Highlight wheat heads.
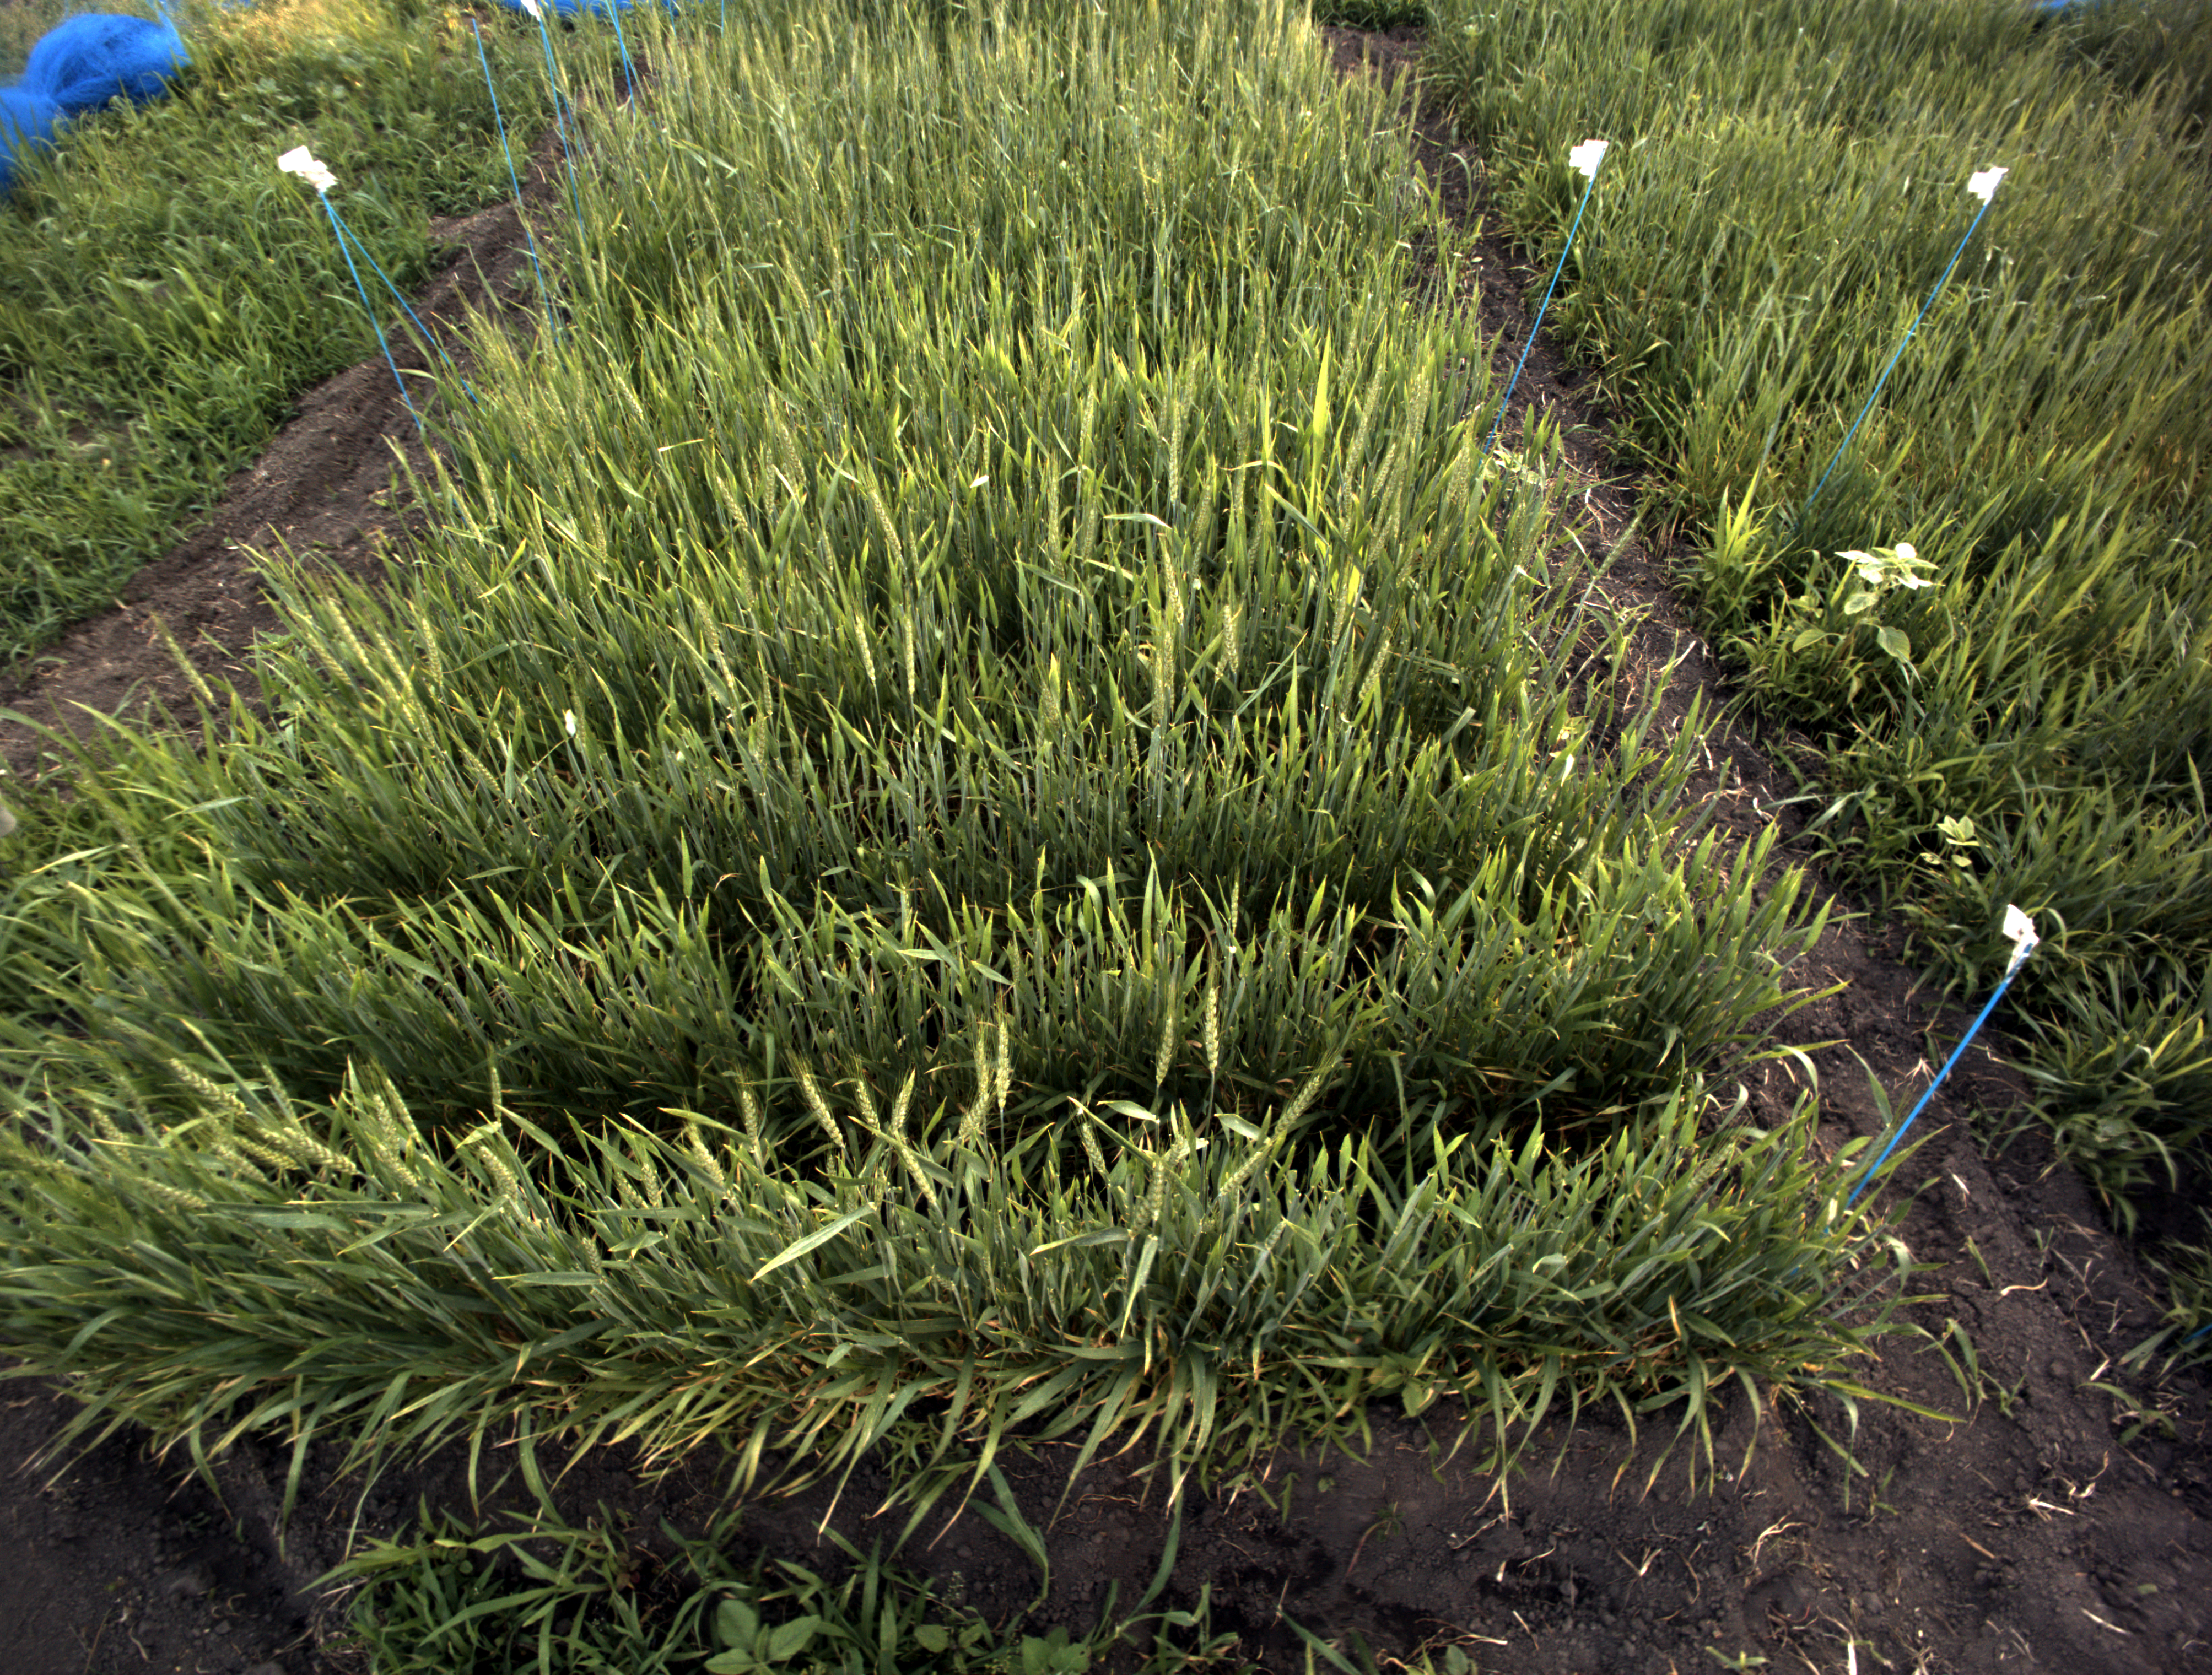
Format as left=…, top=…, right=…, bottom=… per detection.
left=697, top=596, right=721, bottom=652
left=1322, top=46, right=1332, bottom=83
left=852, top=612, right=877, bottom=688
left=783, top=252, right=811, bottom=313
left=1231, top=138, right=1243, bottom=179
left=633, top=1263, right=644, bottom=1281
left=1215, top=647, right=1228, bottom=683
left=779, top=1209, right=794, bottom=1235
left=548, top=380, right=568, bottom=416
left=769, top=43, right=787, bottom=97
left=567, top=465, right=579, bottom=495
left=1869, top=1127, right=1894, bottom=1165
left=935, top=314, right=945, bottom=367
left=721, top=93, right=742, bottom=127
left=1192, top=485, right=1211, bottom=539
left=1190, top=541, right=1203, bottom=583
left=1144, top=180, right=1155, bottom=210
left=1286, top=48, right=1299, bottom=92
left=1391, top=83, right=1403, bottom=112
left=900, top=1147, right=939, bottom=1207
left=666, top=42, right=687, bottom=99
left=614, top=1170, right=649, bottom=1211
left=952, top=50, right=962, bottom=81
left=684, top=174, right=697, bottom=212
left=658, top=97, right=671, bottom=132
left=1770, top=293, right=1785, bottom=324
left=545, top=770, right=558, bottom=791
left=859, top=144, right=871, bottom=179
left=969, top=118, right=987, bottom=152
left=812, top=30, right=822, bottom=52
left=372, top=1093, right=402, bottom=1165
left=1128, top=726, right=1141, bottom=765
left=1614, top=88, right=1624, bottom=110
left=1358, top=639, right=1391, bottom=702
left=255, top=1125, right=303, bottom=1157
left=799, top=942, right=814, bottom=976
left=1674, top=105, right=1688, bottom=131
left=1107, top=52, right=1114, bottom=93
left=1418, top=525, right=1448, bottom=578
left=995, top=1018, right=1011, bottom=1107
left=1513, top=508, right=1525, bottom=557
left=1091, top=26, right=1100, bottom=79
left=696, top=23, right=708, bottom=72
left=1396, top=547, right=1414, bottom=589
left=1341, top=523, right=1351, bottom=539
left=742, top=564, right=757, bottom=606
left=1256, top=287, right=1266, bottom=344
left=969, top=1036, right=992, bottom=1118
left=1475, top=345, right=1494, bottom=382
left=375, top=1141, right=419, bottom=1188
left=598, top=250, right=608, bottom=284
left=1782, top=107, right=1793, bottom=126
left=754, top=711, right=766, bottom=766
left=286, top=587, right=307, bottom=616
left=838, top=758, right=849, bottom=794
left=606, top=65, right=616, bottom=103
left=292, top=1272, right=335, bottom=1300
left=703, top=293, right=715, bottom=347
left=822, top=12, right=835, bottom=54
left=1257, top=32, right=1263, bottom=55
left=758, top=667, right=774, bottom=712
left=1011, top=944, right=1022, bottom=987
left=845, top=1188, right=857, bottom=1215
left=810, top=63, right=817, bottom=96
left=1821, top=116, right=1835, bottom=139
left=1078, top=1120, right=1108, bottom=1174
left=1140, top=40, right=1152, bottom=69
left=922, top=728, right=933, bottom=755
left=580, top=411, right=595, bottom=451
left=1034, top=156, right=1041, bottom=186
left=1131, top=9, right=1138, bottom=48
left=101, top=802, right=149, bottom=865
left=701, top=195, right=720, bottom=227
left=1691, top=230, right=1704, bottom=258
left=1333, top=680, right=1354, bottom=737
left=852, top=107, right=857, bottom=124
left=1233, top=464, right=1245, bottom=514
left=1372, top=506, right=1383, bottom=540
left=589, top=532, right=602, bottom=564
left=804, top=67, right=812, bottom=112
left=1032, top=54, right=1042, bottom=88
left=1072, top=18, right=1079, bottom=53
left=579, top=73, right=591, bottom=108
left=687, top=1121, right=707, bottom=1171
left=649, top=166, right=662, bottom=199
left=902, top=617, right=917, bottom=697
left=691, top=70, right=704, bottom=118
left=1396, top=764, right=1404, bottom=784
left=339, top=953, right=356, bottom=979
left=1167, top=76, right=1176, bottom=105
left=1009, top=46, right=1016, bottom=87
left=1166, top=111, right=1176, bottom=149
left=1040, top=678, right=1061, bottom=735
left=1371, top=441, right=1396, bottom=497
left=528, top=412, right=547, bottom=456
left=1745, top=100, right=1758, bottom=126
left=791, top=752, right=803, bottom=790
left=1153, top=160, right=1160, bottom=185
left=1576, top=852, right=1596, bottom=902
left=1342, top=82, right=1348, bottom=122
left=1168, top=1133, right=1189, bottom=1167
left=1723, top=134, right=1740, bottom=172
left=1393, top=481, right=1402, bottom=540
left=1166, top=150, right=1177, bottom=183
left=705, top=764, right=718, bottom=798
left=840, top=72, right=851, bottom=114
left=1553, top=495, right=1568, bottom=535
left=542, top=79, right=558, bottom=110
left=997, top=21, right=1005, bottom=44
left=1781, top=64, right=1796, bottom=96
left=910, top=81, right=918, bottom=113
left=477, top=1142, right=520, bottom=1215
left=1134, top=73, right=1142, bottom=115
left=1520, top=519, right=1542, bottom=566
left=778, top=761, right=789, bottom=786
left=1219, top=1152, right=1265, bottom=1193
left=468, top=313, right=506, bottom=377
left=1967, top=130, right=1976, bottom=149
left=740, top=44, right=763, bottom=125
left=1205, top=982, right=1220, bottom=1070
left=1311, top=369, right=1318, bottom=394
left=133, top=1175, right=209, bottom=1210
left=654, top=23, right=671, bottom=85
left=649, top=28, right=660, bottom=73
left=823, top=1152, right=838, bottom=1186
left=1363, top=362, right=1382, bottom=413
left=761, top=131, right=768, bottom=164
left=1046, top=472, right=1062, bottom=536
left=1128, top=1184, right=1156, bottom=1238
left=88, top=1104, right=133, bottom=1164
left=1161, top=549, right=1185, bottom=625
left=1278, top=40, right=1289, bottom=80
left=1340, top=131, right=1346, bottom=160
left=794, top=196, right=803, bottom=223
left=260, top=1061, right=299, bottom=1123
left=966, top=207, right=977, bottom=241
left=637, top=170, right=654, bottom=201
left=1291, top=360, right=1299, bottom=401
left=1359, top=57, right=1370, bottom=107
left=2039, top=118, right=2048, bottom=147
left=981, top=428, right=992, bottom=467
left=931, top=52, right=937, bottom=89
left=1344, top=416, right=1368, bottom=483
left=1593, top=516, right=1640, bottom=583
left=893, top=56, right=899, bottom=93
left=1035, top=301, right=1047, bottom=352
left=802, top=1073, right=847, bottom=1148
left=591, top=508, right=607, bottom=560
left=170, top=1055, right=248, bottom=1114
left=1403, top=635, right=1412, bottom=658
left=906, top=54, right=913, bottom=83
left=700, top=72, right=715, bottom=122
left=489, top=1065, right=504, bottom=1121
left=753, top=179, right=764, bottom=215
left=594, top=1289, right=610, bottom=1305
left=1330, top=583, right=1348, bottom=646
left=667, top=510, right=679, bottom=531
left=790, top=29, right=799, bottom=64
left=2093, top=200, right=2116, bottom=227
left=718, top=108, right=728, bottom=141
left=1093, top=768, right=1099, bottom=799
left=707, top=638, right=734, bottom=690
left=1407, top=374, right=1424, bottom=439
left=942, top=159, right=950, bottom=200
left=782, top=455, right=798, bottom=496
left=1271, top=0, right=1284, bottom=61
left=896, top=1081, right=913, bottom=1130
left=85, top=1007, right=134, bottom=1036
left=1189, top=20, right=1210, bottom=93
left=1161, top=628, right=1175, bottom=710
left=840, top=198, right=852, bottom=230
left=966, top=0, right=983, bottom=40
left=858, top=746, right=869, bottom=781
left=554, top=75, right=572, bottom=106
left=114, top=1072, right=153, bottom=1129
left=414, top=701, right=435, bottom=747
left=918, top=51, right=929, bottom=92
left=1316, top=38, right=1323, bottom=56
left=639, top=1160, right=660, bottom=1207
left=1080, top=197, right=1087, bottom=225
left=901, top=884, right=913, bottom=925
left=605, top=125, right=622, bottom=162
left=820, top=532, right=834, bottom=572
left=164, top=636, right=216, bottom=702
left=864, top=23, right=868, bottom=76
left=1368, top=516, right=1394, bottom=565
left=1311, top=117, right=1319, bottom=147
left=932, top=405, right=939, bottom=432
left=1757, top=142, right=1782, bottom=185
left=1081, top=507, right=1095, bottom=564
left=595, top=120, right=615, bottom=157
left=1159, top=194, right=1166, bottom=217
left=421, top=615, right=445, bottom=683
left=620, top=138, right=629, bottom=160
left=691, top=654, right=720, bottom=701
left=865, top=486, right=903, bottom=557
left=376, top=633, right=414, bottom=696
left=1542, top=601, right=1558, bottom=633
left=1247, top=778, right=1260, bottom=814
left=975, top=51, right=989, bottom=89
left=714, top=474, right=750, bottom=529
left=1273, top=1073, right=1320, bottom=1137
left=887, top=181, right=898, bottom=211
left=385, top=1075, right=421, bottom=1143
left=1645, top=114, right=1658, bottom=140
left=402, top=460, right=425, bottom=507
left=1149, top=1156, right=1165, bottom=1223
left=6, top=1148, right=62, bottom=1174
left=1151, top=647, right=1164, bottom=728
left=1248, top=519, right=1264, bottom=571
left=1227, top=743, right=1239, bottom=782
left=914, top=242, right=924, bottom=267
left=1713, top=231, right=1724, bottom=259
left=1458, top=446, right=1471, bottom=510
left=1697, top=154, right=1705, bottom=187
left=738, top=454, right=755, bottom=498
left=1955, top=152, right=1971, bottom=180
left=991, top=501, right=999, bottom=524
left=1312, top=62, right=1320, bottom=100
left=666, top=92, right=679, bottom=132
left=1221, top=602, right=1240, bottom=673
left=740, top=1085, right=759, bottom=1147
left=1229, top=878, right=1240, bottom=936
left=1425, top=925, right=1443, bottom=972
left=674, top=41, right=685, bottom=81
left=305, top=631, right=354, bottom=687
left=814, top=372, right=825, bottom=403
left=1024, top=42, right=1031, bottom=78
left=957, top=1092, right=991, bottom=1133
left=1267, top=1222, right=1287, bottom=1248
left=476, top=460, right=497, bottom=523
left=911, top=339, right=918, bottom=396
left=946, top=409, right=955, bottom=437
left=1384, top=453, right=1405, bottom=503
left=1787, top=178, right=1804, bottom=228
left=1251, top=200, right=1259, bottom=229
left=1007, top=196, right=1013, bottom=225
left=912, top=139, right=921, bottom=175
left=754, top=35, right=766, bottom=73
left=1688, top=1141, right=1734, bottom=1192
left=731, top=135, right=738, bottom=167
left=1079, top=383, right=1096, bottom=445
left=740, top=55, right=744, bottom=83
left=694, top=1141, right=727, bottom=1184
left=1983, top=228, right=1993, bottom=253
left=1263, top=67, right=1271, bottom=103
left=654, top=109, right=663, bottom=136
left=1155, top=920, right=1162, bottom=947
left=1167, top=428, right=1178, bottom=503
left=748, top=127, right=756, bottom=151
left=814, top=348, right=822, bottom=369
left=1074, top=267, right=1083, bottom=317
left=1156, top=395, right=1167, bottom=450
left=1115, top=56, right=1125, bottom=87
left=579, top=1234, right=604, bottom=1275
left=920, top=176, right=930, bottom=216
left=494, top=325, right=520, bottom=374
left=1446, top=447, right=1465, bottom=499
left=1549, top=551, right=1578, bottom=592
left=1551, top=644, right=1574, bottom=678
left=1343, top=475, right=1353, bottom=520
left=1243, top=141, right=1255, bottom=167
left=717, top=40, right=732, bottom=92
left=504, top=373, right=530, bottom=419
left=1338, top=327, right=1356, bottom=399
left=968, top=414, right=978, bottom=467
left=1402, top=797, right=1411, bottom=822
left=1068, top=928, right=1073, bottom=947
left=199, top=1105, right=237, bottom=1154
left=557, top=58, right=570, bottom=91
left=1375, top=288, right=1382, bottom=315
left=1330, top=79, right=1337, bottom=129
left=755, top=70, right=762, bottom=95
left=839, top=172, right=853, bottom=205
left=908, top=529, right=920, bottom=574
left=890, top=1091, right=904, bottom=1136
left=461, top=747, right=504, bottom=797
left=838, top=403, right=844, bottom=434
left=2014, top=217, right=2028, bottom=247
left=1156, top=1015, right=1177, bottom=1087
left=831, top=245, right=843, bottom=312
left=1070, top=62, right=1076, bottom=93
left=541, top=307, right=558, bottom=378
left=583, top=52, right=598, bottom=110
left=1688, top=116, right=1695, bottom=139
left=575, top=370, right=584, bottom=422
left=514, top=409, right=528, bottom=439
left=236, top=1138, right=298, bottom=1169
left=762, top=447, right=775, bottom=514
left=800, top=158, right=821, bottom=193
left=1273, top=922, right=1290, bottom=956
left=533, top=376, right=552, bottom=423
left=1183, top=359, right=1195, bottom=416
left=130, top=961, right=172, bottom=996
left=1040, top=367, right=1050, bottom=415
left=824, top=376, right=833, bottom=417
left=1242, top=352, right=1260, bottom=413
left=1417, top=379, right=1430, bottom=431
left=1400, top=458, right=1409, bottom=489
left=1305, top=377, right=1313, bottom=404
left=211, top=1142, right=269, bottom=1182
left=1027, top=355, right=1039, bottom=387
left=1269, top=172, right=1280, bottom=208
left=446, top=482, right=485, bottom=544
left=1085, top=51, right=1095, bottom=82
left=819, top=227, right=831, bottom=252
left=945, top=465, right=953, bottom=491
left=615, top=376, right=644, bottom=417
left=1035, top=714, right=1046, bottom=753
left=1174, top=399, right=1182, bottom=453
left=642, top=35, right=654, bottom=73
left=604, top=370, right=620, bottom=399
left=1464, top=309, right=1475, bottom=341
left=1065, top=709, right=1072, bottom=748
left=530, top=514, right=548, bottom=555
left=1234, top=411, right=1250, bottom=462
left=1160, top=121, right=1165, bottom=158
left=1149, top=9, right=1157, bottom=56
left=328, top=600, right=371, bottom=669
left=2060, top=136, right=2071, bottom=157
left=850, top=49, right=858, bottom=73
left=854, top=1077, right=882, bottom=1133
left=1244, top=36, right=1257, bottom=75
left=959, top=752, right=971, bottom=782
left=1268, top=196, right=1280, bottom=231
left=779, top=422, right=809, bottom=487
left=284, top=1127, right=360, bottom=1177
left=960, top=168, right=967, bottom=196
left=503, top=414, right=532, bottom=465
left=1178, top=189, right=1184, bottom=223
left=526, top=523, right=543, bottom=557
left=559, top=462, right=573, bottom=493
left=235, top=769, right=256, bottom=799
left=1027, top=159, right=1035, bottom=183
left=1553, top=1156, right=1565, bottom=1192
left=460, top=562, right=491, bottom=606
left=1656, top=130, right=1665, bottom=156
left=988, top=67, right=1000, bottom=112
left=384, top=681, right=415, bottom=729
left=1264, top=30, right=1270, bottom=48
left=1600, top=100, right=1612, bottom=120
left=1221, top=41, right=1234, bottom=97
left=1407, top=107, right=1418, bottom=140
left=1368, top=108, right=1381, bottom=135
left=570, top=691, right=587, bottom=747
left=575, top=642, right=588, bottom=668
left=1048, top=530, right=1066, bottom=581
left=1296, top=46, right=1307, bottom=85
left=576, top=582, right=598, bottom=619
